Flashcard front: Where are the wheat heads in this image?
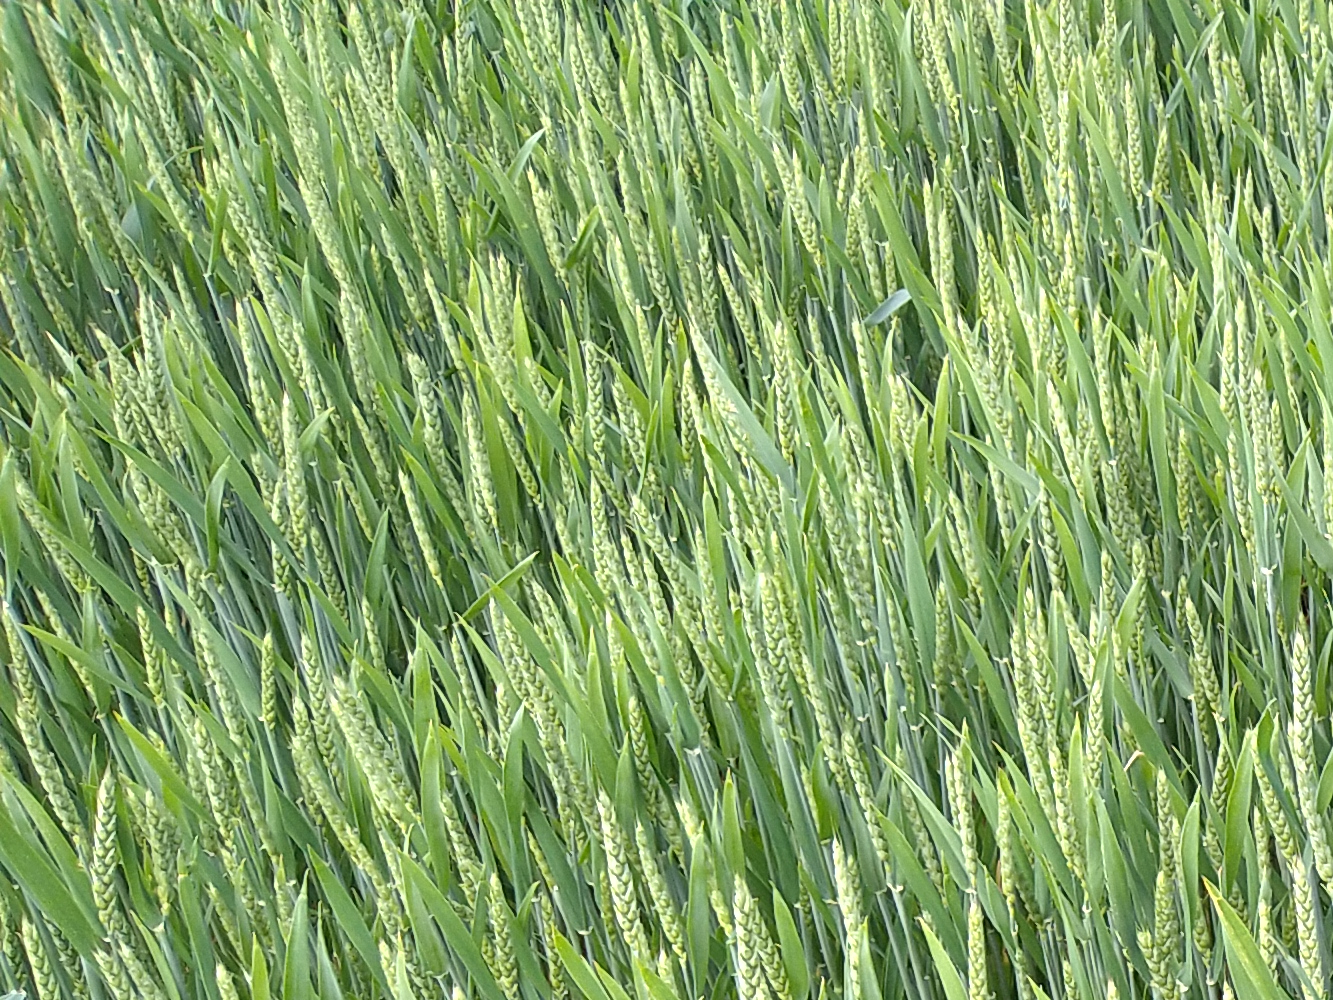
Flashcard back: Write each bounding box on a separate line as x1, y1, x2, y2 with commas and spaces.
741, 473, 768, 529
1230, 59, 1249, 111
62, 416, 108, 475
928, 31, 958, 128
133, 0, 152, 24
253, 255, 294, 369
43, 916, 86, 996
1105, 555, 1112, 643
1006, 628, 1050, 836
758, 0, 778, 63
1032, 55, 1057, 152
969, 902, 990, 1000
537, 0, 559, 44
778, 52, 811, 107
636, 23, 667, 133
923, 180, 934, 289
1036, 484, 1058, 598
1205, 739, 1233, 837
337, 459, 369, 537
1251, 805, 1271, 980
608, 238, 636, 313
1057, 600, 1095, 676
202, 99, 231, 164
741, 587, 774, 715
1000, 777, 1018, 910
563, 754, 601, 839
151, 16, 178, 95
957, 736, 979, 878
294, 703, 318, 802
1271, 34, 1302, 146
1132, 933, 1179, 1000
488, 594, 538, 709
50, 117, 105, 244
523, 825, 560, 904
296, 177, 348, 290
1257, 56, 1275, 139
1082, 681, 1101, 791
1060, 957, 1086, 1000
1005, 224, 1018, 307
37, 10, 85, 101
1062, 8, 1077, 79
451, 633, 484, 736
619, 83, 654, 191
665, 623, 704, 726
1091, 61, 1115, 114
1201, 185, 1213, 253
899, 776, 940, 893
1067, 266, 1077, 328
1308, 28, 1324, 69
973, 182, 986, 236
1106, 105, 1120, 172
685, 362, 698, 474
695, 333, 756, 443
819, 485, 878, 633
99, 329, 184, 460
773, 324, 790, 454
1204, 832, 1237, 909
252, 455, 270, 510
761, 582, 795, 705
23, 920, 82, 1000
141, 505, 208, 566
845, 737, 884, 859
0, 896, 38, 1000
383, 225, 429, 327
124, 397, 175, 472
934, 584, 953, 688
118, 950, 194, 1000
1243, 171, 1252, 216
606, 556, 664, 672
0, 47, 18, 99
808, 312, 835, 416
277, 0, 292, 37
580, 124, 618, 238
1187, 470, 1222, 529
829, 584, 857, 676
939, 217, 950, 301
974, 230, 990, 312
333, 681, 416, 797
946, 520, 963, 571
1197, 101, 1226, 184
219, 184, 283, 286
191, 724, 250, 840
1068, 164, 1080, 256
1250, 374, 1268, 487
0, 277, 44, 380
464, 25, 477, 113
464, 396, 495, 524
1292, 633, 1312, 726
1290, 723, 1333, 870
665, 102, 700, 178
1102, 460, 1129, 546
499, 417, 534, 494
197, 633, 234, 724
262, 633, 273, 721
129, 793, 147, 841
773, 158, 814, 247
13, 704, 90, 866
674, 605, 730, 694
614, 384, 647, 473
88, 511, 96, 587
889, 374, 918, 472
97, 773, 118, 937
574, 30, 623, 123
1270, 401, 1284, 479
618, 155, 653, 284
134, 555, 161, 606
363, 598, 387, 673
833, 847, 857, 935
780, 578, 809, 694
430, 144, 451, 260
1321, 410, 1333, 541
584, 339, 603, 455
590, 460, 639, 518
172, 265, 216, 368
175, 74, 200, 138
489, 869, 522, 1000
1185, 661, 1213, 750
1049, 395, 1082, 499
1050, 744, 1083, 880
1227, 434, 1250, 543
327, 706, 402, 806
397, 942, 445, 1000
0, 162, 35, 226
271, 59, 311, 158
366, 95, 394, 164
1, 414, 30, 476
1209, 37, 1226, 125
1085, 607, 1099, 653
888, 603, 913, 697
1127, 85, 1144, 194
886, 240, 891, 291
726, 466, 744, 542
208, 885, 236, 951
243, 58, 274, 107
856, 106, 870, 169
1017, 145, 1029, 200
536, 891, 559, 986
136, 611, 164, 710
534, 687, 557, 742
802, 31, 845, 127
443, 37, 458, 103
130, 353, 146, 404
670, 252, 711, 338
687, 70, 725, 175
1044, 0, 1063, 92
1028, 603, 1050, 722
508, 0, 546, 70
601, 869, 623, 954
348, 7, 394, 107
812, 101, 847, 189
151, 301, 166, 345
542, 742, 590, 859
1299, 75, 1316, 172
1280, 327, 1291, 396
1126, 542, 1144, 665
139, 290, 169, 418
420, 274, 471, 384
270, 480, 288, 589
988, 3, 1013, 96
847, 7, 875, 101
1288, 872, 1325, 996
1327, 1, 1333, 50
520, 360, 554, 407
470, 319, 519, 407
852, 426, 891, 540
1218, 324, 1231, 417
621, 535, 646, 604
38, 588, 99, 689
1105, 0, 1115, 74
90, 34, 141, 105
94, 957, 175, 1000
294, 317, 326, 427
591, 792, 652, 953
910, 0, 928, 59
159, 0, 175, 43
630, 698, 674, 833
560, 51, 591, 100
761, 922, 794, 998
1044, 167, 1068, 251
944, 175, 959, 238
1085, 418, 1102, 506
194, 0, 216, 73
185, 755, 216, 855
532, 578, 568, 653
751, 963, 807, 1000
100, 379, 155, 521
1320, 156, 1333, 216
1147, 56, 1160, 106
842, 191, 863, 258
24, 239, 97, 368
735, 255, 762, 307
740, 179, 764, 277
178, 702, 194, 750
717, 266, 762, 360
1237, 304, 1251, 418
1262, 145, 1308, 230
492, 255, 524, 362
232, 299, 280, 445
13, 144, 68, 282
1324, 63, 1333, 94
697, 245, 717, 328
1013, 952, 1035, 1000
1091, 322, 1110, 433
587, 470, 608, 593
643, 562, 676, 661
401, 473, 446, 576
335, 96, 366, 167
281, 393, 311, 543
732, 879, 755, 1000
850, 319, 875, 415
315, 0, 340, 103
1174, 427, 1189, 533
840, 441, 872, 551
1039, 299, 1050, 365
632, 820, 686, 953
298, 636, 346, 784
751, 52, 767, 95
1191, 903, 1209, 960
802, 649, 845, 783
294, 737, 358, 853
941, 758, 960, 831
17, 487, 97, 594
338, 301, 365, 407
222, 853, 274, 958
1160, 770, 1178, 894
781, 3, 798, 58
960, 322, 1008, 429
987, 313, 1004, 395
273, 868, 286, 922
722, 18, 747, 103
534, 180, 560, 280
426, 441, 484, 555
1115, 384, 1156, 524
374, 880, 405, 944
153, 739, 184, 806
102, 202, 152, 289
646, 236, 676, 328
365, 0, 401, 73
1296, 0, 1317, 45
824, 0, 849, 93
442, 799, 498, 921
307, 526, 348, 620
155, 799, 183, 918
409, 356, 441, 444
1085, 139, 1105, 227
728, 427, 779, 505
1254, 744, 1300, 849
659, 952, 692, 1000
19, 6, 50, 77
501, 37, 532, 90
1188, 607, 1223, 715
38, 136, 74, 240
133, 45, 197, 180
134, 117, 181, 229
377, 476, 425, 590
847, 930, 864, 1000
636, 501, 700, 607
368, 245, 385, 304
342, 80, 380, 178
5, 612, 49, 726
363, 427, 397, 495
62, 0, 108, 57
951, 494, 982, 599
857, 207, 880, 300
1150, 128, 1171, 201
868, 18, 896, 89
556, 512, 574, 568
1249, 210, 1270, 251
1152, 870, 1177, 960
988, 455, 1016, 543
214, 968, 275, 1000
